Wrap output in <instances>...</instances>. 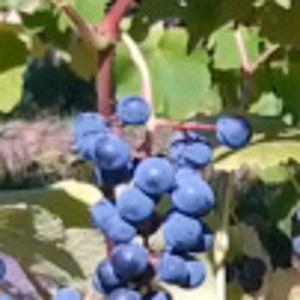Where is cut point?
Instances as JSON below:
<instances>
[{"mask_svg": "<svg viewBox=\"0 0 300 300\" xmlns=\"http://www.w3.org/2000/svg\"><path fill=\"white\" fill-rule=\"evenodd\" d=\"M117 38L126 43V46L128 47V50L132 57V60L135 63L140 75V80L142 82V88H143V97L145 99H150L152 97L151 77L149 75V70L140 53V50L137 46L135 39L127 31H119L117 33Z\"/></svg>", "mask_w": 300, "mask_h": 300, "instance_id": "6a23745f", "label": "cut point"}]
</instances>
